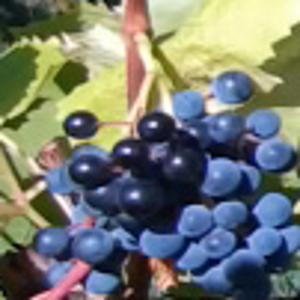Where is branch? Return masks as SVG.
Masks as SVG:
<instances>
[{
    "label": "branch",
    "mask_w": 300,
    "mask_h": 300,
    "mask_svg": "<svg viewBox=\"0 0 300 300\" xmlns=\"http://www.w3.org/2000/svg\"><path fill=\"white\" fill-rule=\"evenodd\" d=\"M124 10V32L128 40V83L127 99L128 110L136 104L139 90L144 83L146 70L141 59V54L134 34L143 32L148 35L153 30L150 20L152 10L149 0H123Z\"/></svg>",
    "instance_id": "obj_1"
}]
</instances>
